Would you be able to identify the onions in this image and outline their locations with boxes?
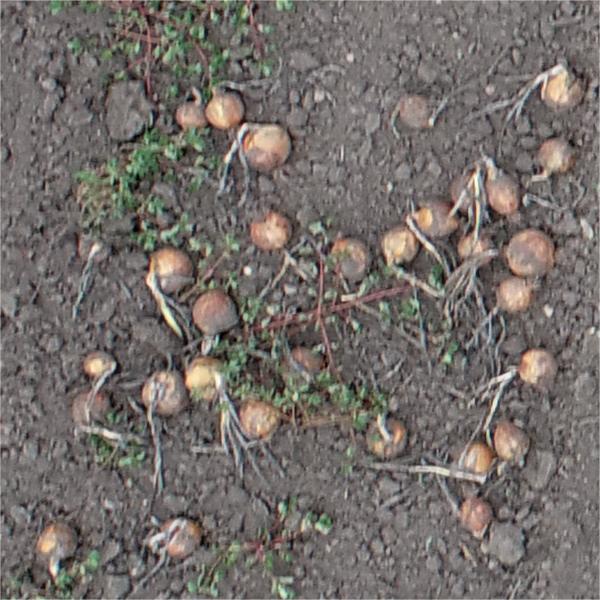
[367,416,405,455]
[249,210,291,249]
[239,397,279,439]
[329,239,369,283]
[381,229,416,263]
[190,291,237,338]
[492,419,527,464]
[485,175,522,215]
[204,88,243,127]
[504,230,554,276]
[141,372,185,415]
[457,498,491,534]
[535,138,572,174]
[517,348,556,385]
[417,201,458,240]
[281,346,323,386]
[80,350,111,378]
[453,233,493,262]
[32,522,76,558]
[75,389,109,426]
[239,124,288,170]
[392,94,431,132]
[183,359,219,397]
[459,441,495,476]
[495,277,532,312]
[450,172,481,216]
[160,515,200,558]
[147,245,192,292]
[175,100,204,126]
[538,68,578,107]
